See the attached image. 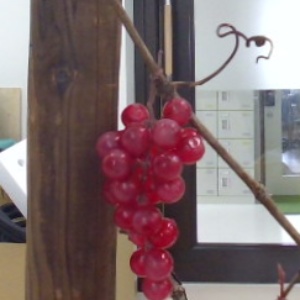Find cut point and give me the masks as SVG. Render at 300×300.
<instances>
[{
	"mask_svg": "<svg viewBox=\"0 0 300 300\" xmlns=\"http://www.w3.org/2000/svg\"><path fill=\"white\" fill-rule=\"evenodd\" d=\"M155 74L150 75V95L149 101H147L146 106L150 111V119H147L146 125L148 127H154L158 123V119L156 118V114L153 110V100L155 99Z\"/></svg>",
	"mask_w": 300,
	"mask_h": 300,
	"instance_id": "obj_1",
	"label": "cut point"
}]
</instances>
